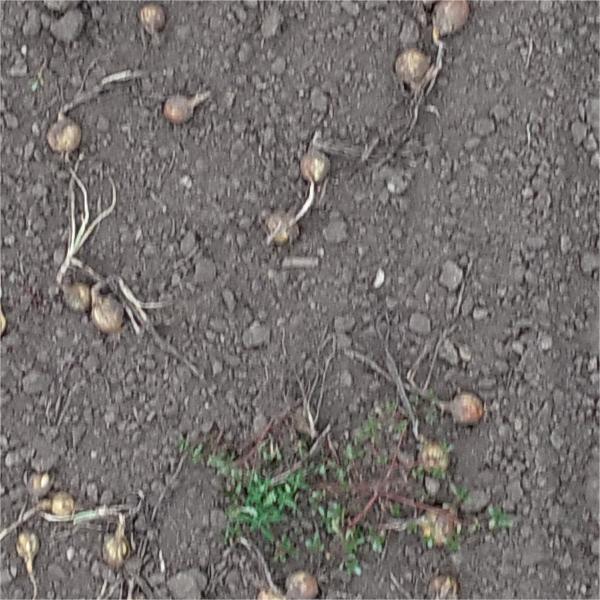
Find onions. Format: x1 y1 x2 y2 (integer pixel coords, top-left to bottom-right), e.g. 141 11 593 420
27 469 51 493
430 573 456 597
416 439 448 470
15 531 41 562
420 507 458 546
381 168 409 194
298 152 328 180
62 278 90 311
136 3 166 30
448 390 483 425
101 521 131 566
164 92 194 123
265 209 298 245
284 567 318 598
46 491 73 520
45 119 80 153
255 583 284 600
394 47 432 85
431 0 470 34
89 292 122 330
